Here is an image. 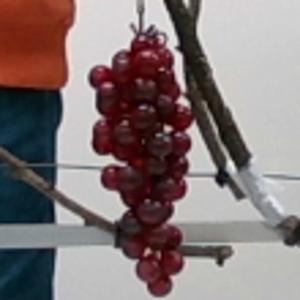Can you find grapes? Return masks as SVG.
<instances>
[{"label":"grapes","mask_w":300,"mask_h":300,"mask_svg":"<svg viewBox=\"0 0 300 300\" xmlns=\"http://www.w3.org/2000/svg\"><path fill=\"white\" fill-rule=\"evenodd\" d=\"M130 49L114 54L111 67L91 68L88 81L98 90L95 109L102 120L92 129L91 147L101 157L112 156L127 168H103L104 188L117 191L128 211L118 220V234L126 258L138 261L135 273L156 297L170 293L173 280L185 265L184 235L167 225L173 203L187 191L183 176L191 147L187 132L195 122L188 106L178 104L182 89L170 49L157 36L137 33Z\"/></svg>","instance_id":"01657485"}]
</instances>
